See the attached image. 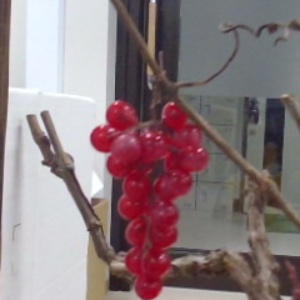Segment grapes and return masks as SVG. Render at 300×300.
Returning a JSON list of instances; mask_svg holds the SVG:
<instances>
[{
  "mask_svg": "<svg viewBox=\"0 0 300 300\" xmlns=\"http://www.w3.org/2000/svg\"><path fill=\"white\" fill-rule=\"evenodd\" d=\"M104 119L92 129L90 142L97 152L110 154L107 171L123 179L117 213L129 221L124 238L131 245L124 264L137 277L135 296L154 300L170 267L163 255L178 240L174 225L180 210L173 202L192 189L191 173L206 167L210 153L200 144V126L189 124L172 102L162 110L164 128L138 125L135 108L124 99L113 101Z\"/></svg>",
  "mask_w": 300,
  "mask_h": 300,
  "instance_id": "grapes-1",
  "label": "grapes"
}]
</instances>
